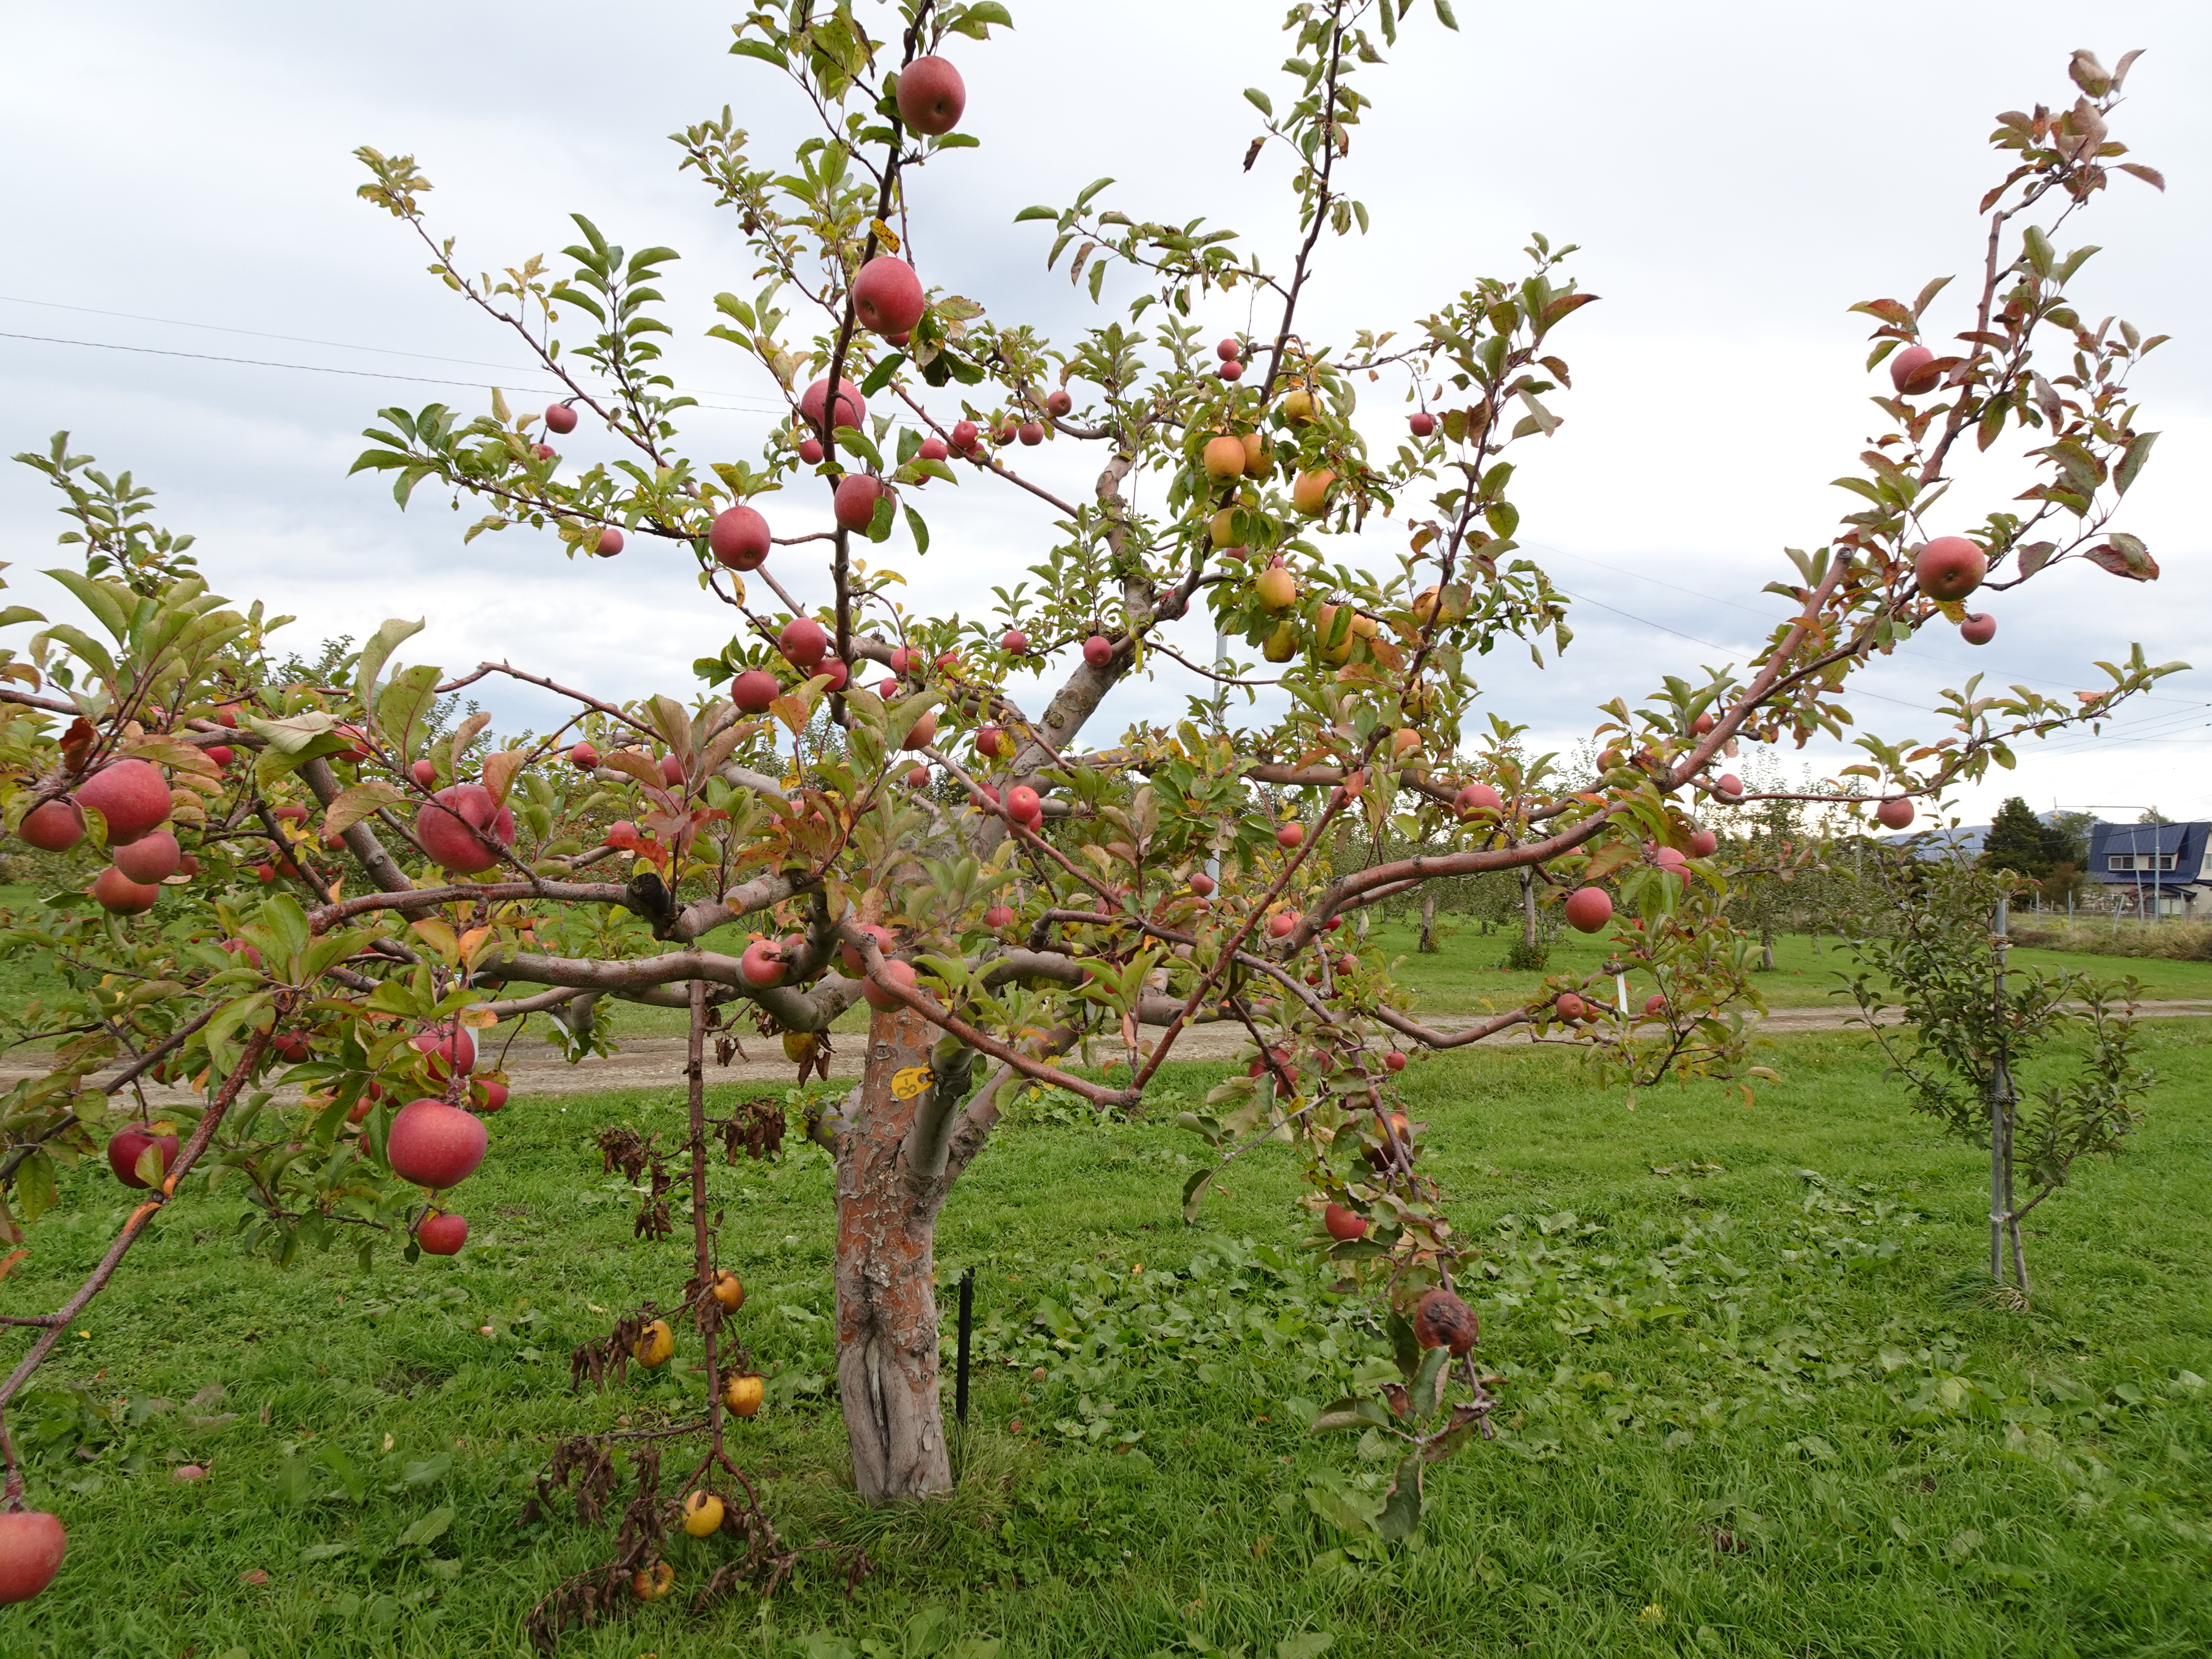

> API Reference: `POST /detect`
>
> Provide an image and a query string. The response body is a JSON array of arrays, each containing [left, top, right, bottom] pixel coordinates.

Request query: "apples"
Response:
[[343, 1095, 372, 1126], [268, 798, 311, 829], [1384, 727, 1422, 762], [1640, 838, 1668, 865], [314, 826, 350, 854], [1642, 993, 1672, 1023], [1196, 898, 1236, 932], [990, 416, 1017, 446], [1276, 820, 1306, 849], [408, 1022, 476, 1084], [969, 778, 1002, 817], [316, 855, 345, 880], [112, 823, 182, 887], [1399, 678, 1440, 723], [243, 858, 275, 884], [1239, 433, 1276, 481], [1683, 827, 1717, 859], [625, 751, 655, 774], [1631, 936, 1657, 962], [1253, 997, 1278, 1020], [68, 758, 174, 847], [947, 693, 981, 722], [407, 967, 434, 992], [929, 651, 962, 679], [1323, 1194, 1369, 1241], [1678, 708, 1713, 742], [798, 374, 866, 444], [1007, 785, 1040, 824], [1284, 390, 1321, 428], [1203, 436, 1248, 487], [314, 736, 343, 762], [175, 786, 200, 809], [545, 402, 578, 436], [146, 1041, 188, 1085], [1384, 1051, 1409, 1073], [1711, 772, 1742, 806], [681, 1488, 727, 1539], [704, 1270, 746, 1316], [1409, 412, 1436, 438], [901, 455, 934, 488], [1268, 913, 1296, 942], [964, 441, 987, 465], [798, 437, 826, 465], [209, 1035, 239, 1065], [521, 443, 558, 474], [947, 432, 969, 459], [778, 928, 819, 960], [1000, 631, 1029, 659], [1914, 536, 1987, 601], [881, 311, 919, 348], [973, 719, 1011, 762], [569, 742, 603, 774], [1292, 467, 1342, 517], [852, 255, 925, 336], [630, 1556, 677, 1602], [1318, 905, 1347, 933], [346, 930, 386, 958], [429, 1073, 475, 1108], [1047, 389, 1072, 419], [1313, 628, 1356, 673], [1261, 617, 1301, 665], [1555, 992, 1584, 1023], [193, 740, 235, 771], [730, 668, 780, 716], [934, 677, 957, 697], [894, 54, 966, 137], [1877, 796, 1916, 831], [890, 646, 923, 679], [405, 781, 418, 793], [274, 859, 310, 878], [1960, 610, 1998, 647], [1677, 960, 1701, 980], [1579, 1009, 1602, 1026], [219, 771, 231, 784], [1082, 961, 1128, 1009], [1082, 635, 1115, 665], [1094, 886, 1144, 931], [721, 1373, 764, 1419], [1328, 785, 1352, 811], [326, 720, 374, 764], [470, 931, 501, 964], [88, 749, 117, 779], [842, 923, 894, 977], [1281, 912, 1305, 933], [1304, 957, 1326, 985], [1215, 338, 1240, 362], [835, 474, 896, 538], [94, 862, 161, 919], [1220, 361, 1245, 383], [658, 753, 699, 787], [270, 1027, 319, 1065], [143, 703, 171, 734], [763, 806, 788, 827], [1078, 619, 1110, 649], [371, 1059, 422, 1111], [1225, 542, 1251, 567], [1309, 1049, 1332, 1074], [1165, 900, 1189, 924], [592, 526, 624, 559], [415, 1211, 469, 1256], [1549, 840, 1585, 868], [205, 702, 251, 735], [627, 1317, 675, 1371], [1233, 411, 1254, 432], [0, 1510, 68, 1610], [506, 443, 526, 463], [661, 789, 695, 817], [1413, 582, 1462, 624], [1648, 847, 1691, 898], [386, 1095, 489, 1192], [1254, 551, 1283, 576], [107, 1121, 181, 1193], [860, 958, 920, 1015], [414, 782, 515, 876], [1888, 343, 1941, 397], [779, 616, 827, 667], [951, 419, 980, 449], [1333, 947, 1364, 978], [1454, 785, 1501, 831], [1638, 743, 1667, 766], [1210, 506, 1253, 551], [14, 798, 88, 854], [1595, 748, 1626, 778], [1205, 422, 1230, 443], [878, 678, 908, 704], [362, 1129, 382, 1160], [1414, 1288, 1480, 1363], [1314, 942, 1337, 956], [212, 937, 261, 979], [1020, 423, 1047, 447], [772, 798, 825, 853], [1564, 884, 1612, 935], [899, 759, 935, 790], [1003, 803, 1044, 839], [1777, 706, 1788, 715], [1313, 603, 1353, 642], [605, 747, 632, 773], [1244, 1044, 1297, 1105], [265, 839, 307, 869], [1188, 872, 1215, 898], [1328, 978, 1361, 1004], [919, 437, 948, 468], [608, 814, 643, 849], [807, 655, 847, 693], [159, 850, 199, 887], [892, 703, 937, 753], [1256, 567, 1296, 616], [478, 966, 503, 990], [708, 505, 771, 572], [1159, 587, 1190, 622], [1371, 1114, 1407, 1150], [1348, 612, 1378, 649], [982, 905, 1014, 934], [1893, 603, 1913, 622], [406, 759, 444, 786]]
